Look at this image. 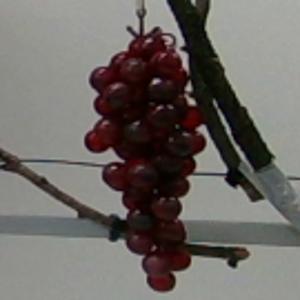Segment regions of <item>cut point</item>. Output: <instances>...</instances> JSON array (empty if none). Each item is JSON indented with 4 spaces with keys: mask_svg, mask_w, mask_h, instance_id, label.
<instances>
[{
    "mask_svg": "<svg viewBox=\"0 0 300 300\" xmlns=\"http://www.w3.org/2000/svg\"><path fill=\"white\" fill-rule=\"evenodd\" d=\"M133 14L137 17L138 20L137 36L145 37V18L148 14L146 0H136V6H134Z\"/></svg>",
    "mask_w": 300,
    "mask_h": 300,
    "instance_id": "cut-point-1",
    "label": "cut point"
}]
</instances>
